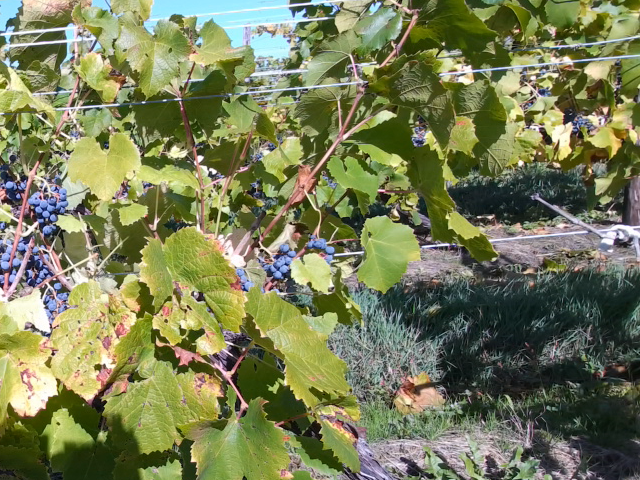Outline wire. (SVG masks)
Here are the masks:
<instances>
[{
    "instance_id": "1",
    "label": "wire",
    "mask_w": 640,
    "mask_h": 480,
    "mask_svg": "<svg viewBox=\"0 0 640 480\" xmlns=\"http://www.w3.org/2000/svg\"><path fill=\"white\" fill-rule=\"evenodd\" d=\"M371 84H372L371 80H355V81H346V82H331L328 84L302 86V87H278L274 89H240V90H234V91L190 94V95H185L183 97L153 98L146 101H138V102H109V103H96L91 105L60 106V107H55L54 111L62 112V111L93 110L98 108H112V107H140V106H148L155 103L184 102L192 99L236 96V95H242V94H276L281 92H304V91L330 89L333 87H349V86L371 85Z\"/></svg>"
},
{
    "instance_id": "2",
    "label": "wire",
    "mask_w": 640,
    "mask_h": 480,
    "mask_svg": "<svg viewBox=\"0 0 640 480\" xmlns=\"http://www.w3.org/2000/svg\"><path fill=\"white\" fill-rule=\"evenodd\" d=\"M638 58H640V53L614 56V57H593V58L576 59V60L552 59V60H545L542 62H534V63H527V64H505V65H499V66L461 69L453 72H439L438 76L439 77H455L459 75L473 74V73H479V72H493V71H501V70H507V69H529V68L544 67L547 65H555V64L578 65V64L595 63V62H617V61H624V60H633Z\"/></svg>"
},
{
    "instance_id": "3",
    "label": "wire",
    "mask_w": 640,
    "mask_h": 480,
    "mask_svg": "<svg viewBox=\"0 0 640 480\" xmlns=\"http://www.w3.org/2000/svg\"><path fill=\"white\" fill-rule=\"evenodd\" d=\"M343 0H323L316 2H308V3H285L279 4L274 7H266V8H250V9H239L237 11H211L203 14H188L185 13L184 17L186 19H205L213 16H239L241 14H252V13H268V12H276L287 8H311L325 5H338L342 4Z\"/></svg>"
},
{
    "instance_id": "4",
    "label": "wire",
    "mask_w": 640,
    "mask_h": 480,
    "mask_svg": "<svg viewBox=\"0 0 640 480\" xmlns=\"http://www.w3.org/2000/svg\"><path fill=\"white\" fill-rule=\"evenodd\" d=\"M640 40V34L627 38H610L607 40H598L593 42H580V43H551L542 45H532L526 47H514L510 49L511 53L516 52H528L534 50H544L553 48H582V47H595L600 45H609L612 43H629Z\"/></svg>"
},
{
    "instance_id": "5",
    "label": "wire",
    "mask_w": 640,
    "mask_h": 480,
    "mask_svg": "<svg viewBox=\"0 0 640 480\" xmlns=\"http://www.w3.org/2000/svg\"><path fill=\"white\" fill-rule=\"evenodd\" d=\"M333 16L326 17H302V18H293L289 20H281L276 22H259V23H247L241 25H225V30H244L249 28H261V27H278L283 25H291L295 23H304V22H329L333 21Z\"/></svg>"
},
{
    "instance_id": "6",
    "label": "wire",
    "mask_w": 640,
    "mask_h": 480,
    "mask_svg": "<svg viewBox=\"0 0 640 480\" xmlns=\"http://www.w3.org/2000/svg\"><path fill=\"white\" fill-rule=\"evenodd\" d=\"M591 233H592L591 229L571 230L568 232L524 235V236L509 237V238H490L489 242L490 243H511V242L526 241V240L570 237L574 235H586Z\"/></svg>"
},
{
    "instance_id": "7",
    "label": "wire",
    "mask_w": 640,
    "mask_h": 480,
    "mask_svg": "<svg viewBox=\"0 0 640 480\" xmlns=\"http://www.w3.org/2000/svg\"><path fill=\"white\" fill-rule=\"evenodd\" d=\"M95 41L94 37L80 39V40H32L21 43H8V48H23L34 45H82Z\"/></svg>"
},
{
    "instance_id": "8",
    "label": "wire",
    "mask_w": 640,
    "mask_h": 480,
    "mask_svg": "<svg viewBox=\"0 0 640 480\" xmlns=\"http://www.w3.org/2000/svg\"><path fill=\"white\" fill-rule=\"evenodd\" d=\"M76 29H77L76 25L47 27V28H41V29H20L14 32H0V37H16L23 34H43V33H49V32H62V31L76 30Z\"/></svg>"
},
{
    "instance_id": "9",
    "label": "wire",
    "mask_w": 640,
    "mask_h": 480,
    "mask_svg": "<svg viewBox=\"0 0 640 480\" xmlns=\"http://www.w3.org/2000/svg\"><path fill=\"white\" fill-rule=\"evenodd\" d=\"M300 72L307 73V67H298L290 70H270V71H262V72H253V77H264V76H272V75H292Z\"/></svg>"
},
{
    "instance_id": "10",
    "label": "wire",
    "mask_w": 640,
    "mask_h": 480,
    "mask_svg": "<svg viewBox=\"0 0 640 480\" xmlns=\"http://www.w3.org/2000/svg\"><path fill=\"white\" fill-rule=\"evenodd\" d=\"M72 93L71 89H47V90H41V91H34L33 92V96L37 97V96H43V95H49V94H62V95H70Z\"/></svg>"
},
{
    "instance_id": "11",
    "label": "wire",
    "mask_w": 640,
    "mask_h": 480,
    "mask_svg": "<svg viewBox=\"0 0 640 480\" xmlns=\"http://www.w3.org/2000/svg\"><path fill=\"white\" fill-rule=\"evenodd\" d=\"M26 114L36 115L37 111L36 110H32V109L5 111V112H0V117L26 115Z\"/></svg>"
},
{
    "instance_id": "12",
    "label": "wire",
    "mask_w": 640,
    "mask_h": 480,
    "mask_svg": "<svg viewBox=\"0 0 640 480\" xmlns=\"http://www.w3.org/2000/svg\"><path fill=\"white\" fill-rule=\"evenodd\" d=\"M203 81H204V78H203V77H197V78H194V79H188V80L183 79V80H182V83H183V84H186V83H188V84H197V83H199V82H203Z\"/></svg>"
}]
</instances>
